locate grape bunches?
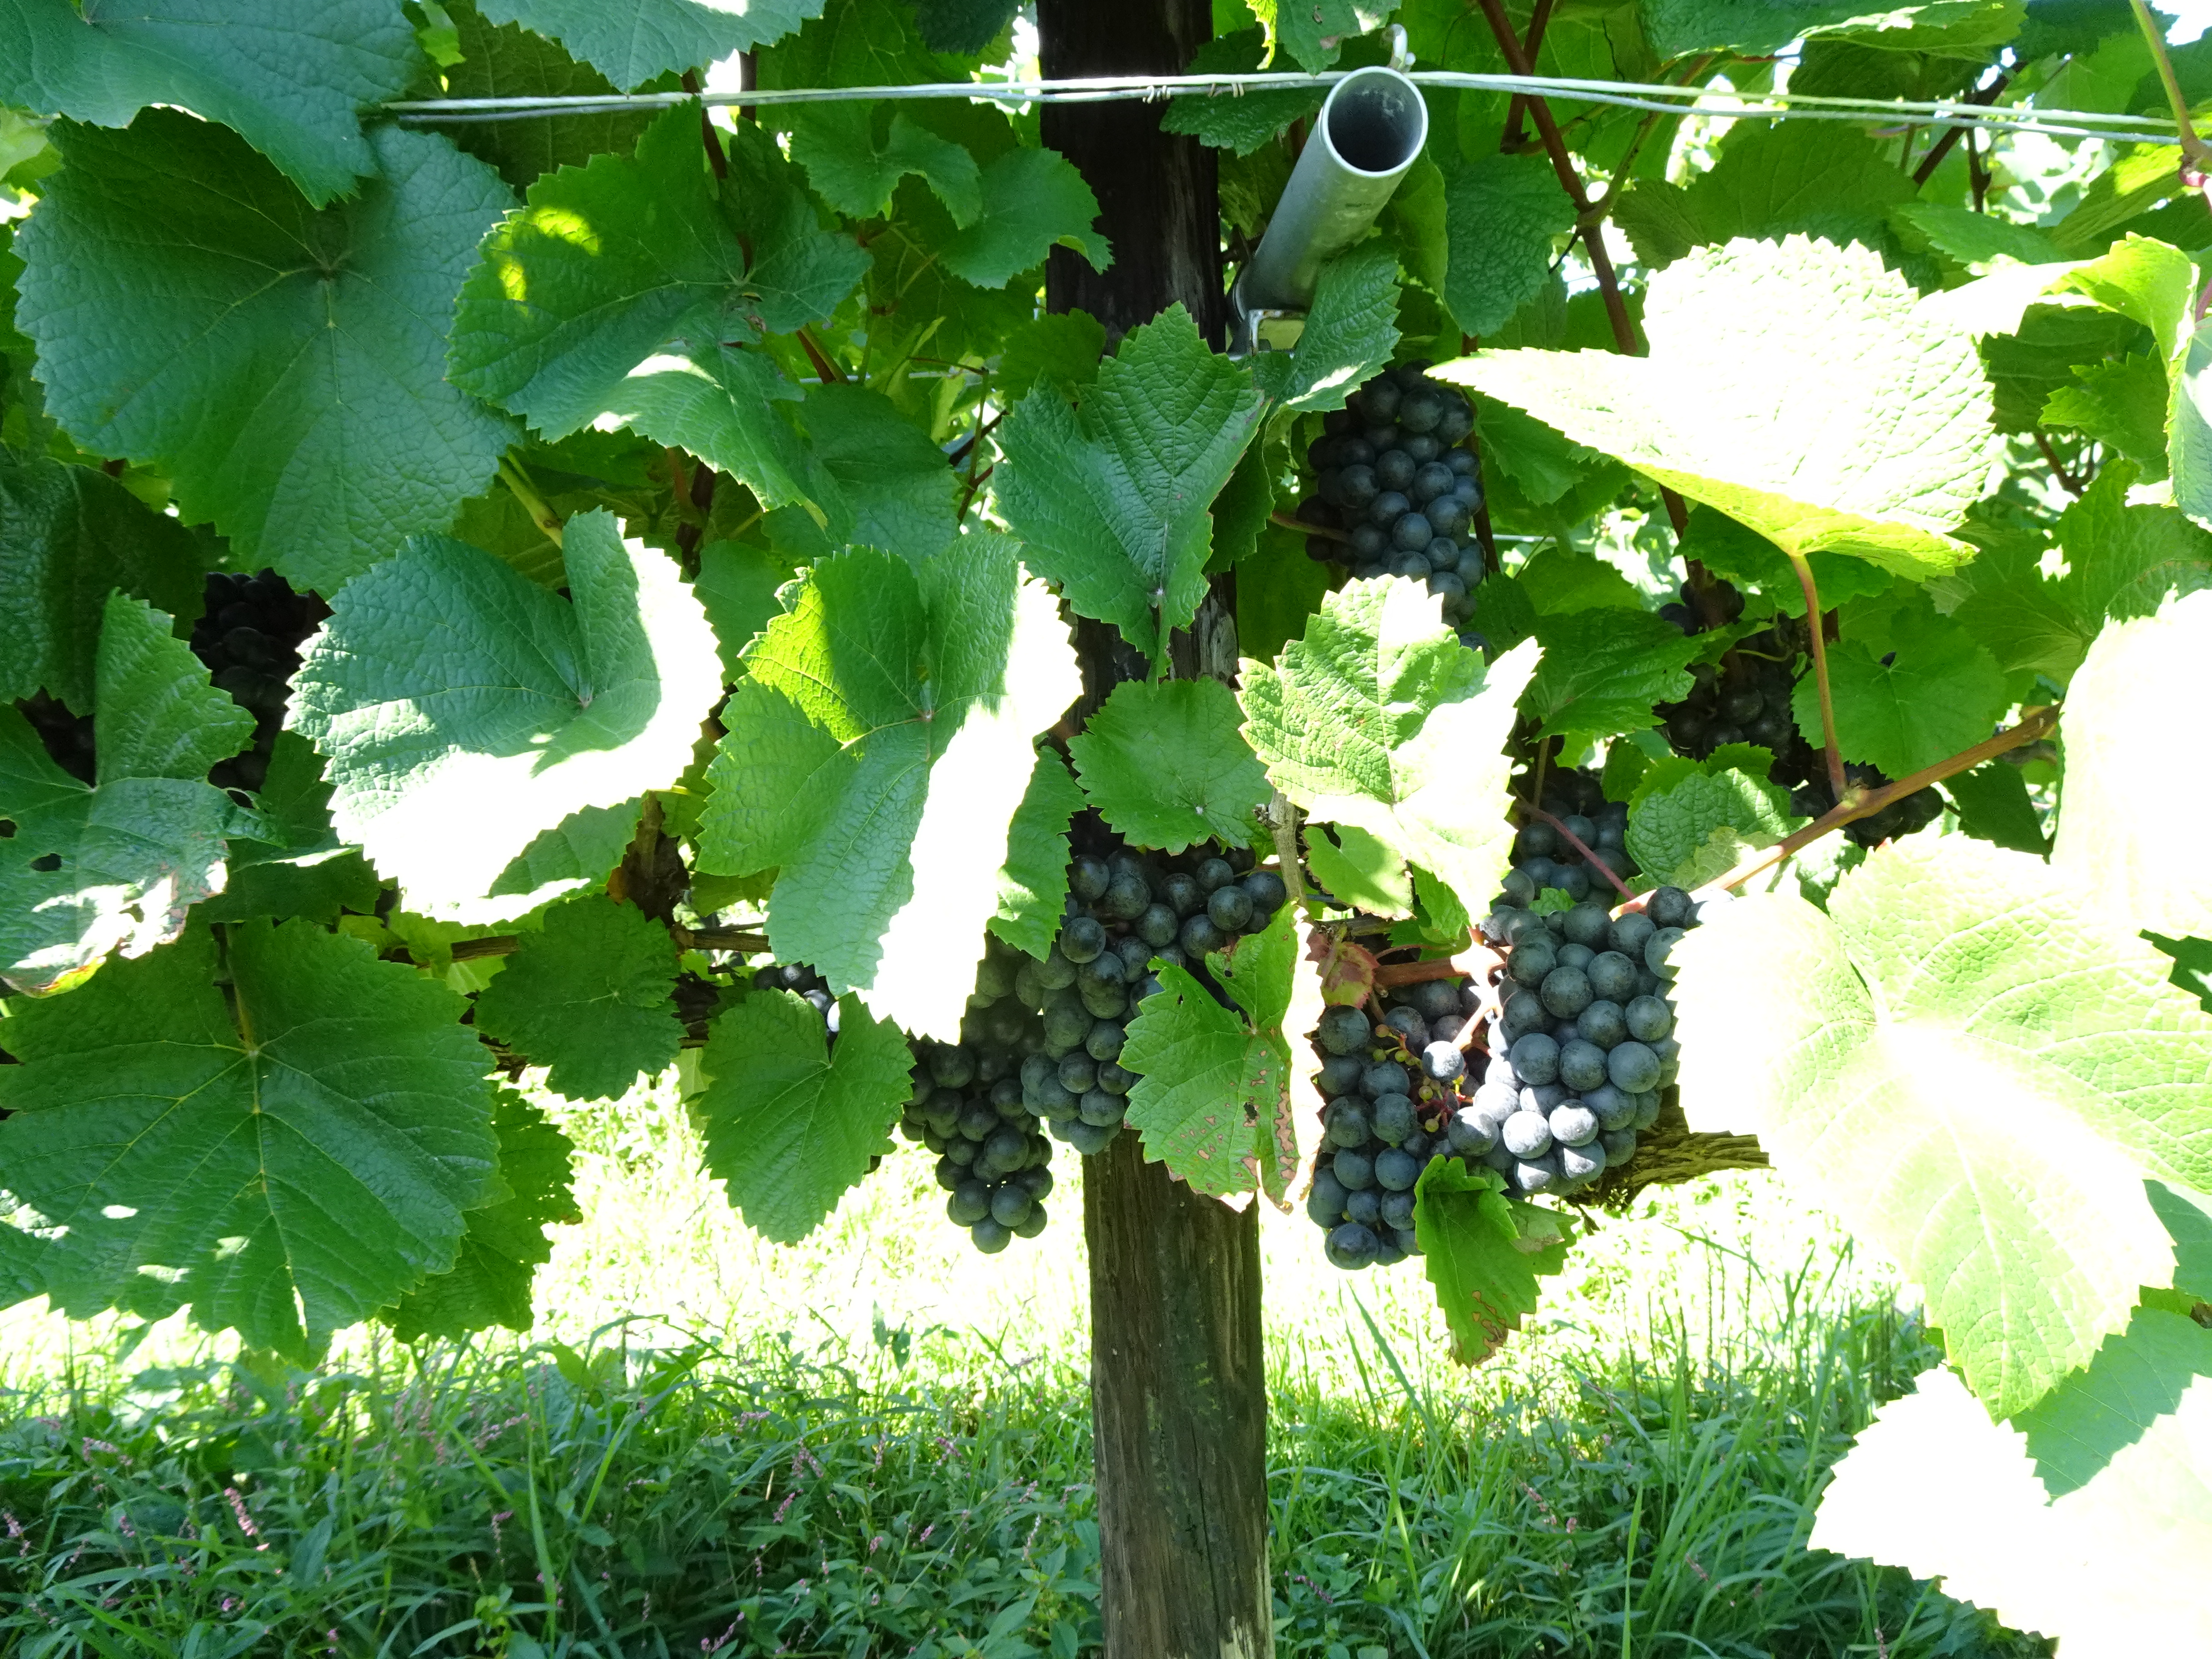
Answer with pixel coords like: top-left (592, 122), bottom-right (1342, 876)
top-left (1786, 746), bottom-right (1943, 850)
top-left (1448, 868), bottom-right (1706, 1193)
top-left (1509, 711), bottom-right (1569, 756)
top-left (13, 685), bottom-right (98, 787)
top-left (1306, 931), bottom-right (1497, 1269)
top-left (970, 806), bottom-right (1287, 1156)
top-left (191, 563), bottom-right (334, 808)
top-left (754, 960), bottom-right (836, 1020)
top-left (862, 1120), bottom-right (895, 1174)
top-left (1294, 816), bottom-right (1354, 911)
top-left (901, 929), bottom-right (1044, 1253)
top-left (1295, 361), bottom-right (1492, 666)
top-left (1650, 570), bottom-right (1842, 789)
top-left (1515, 765), bottom-right (1647, 902)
